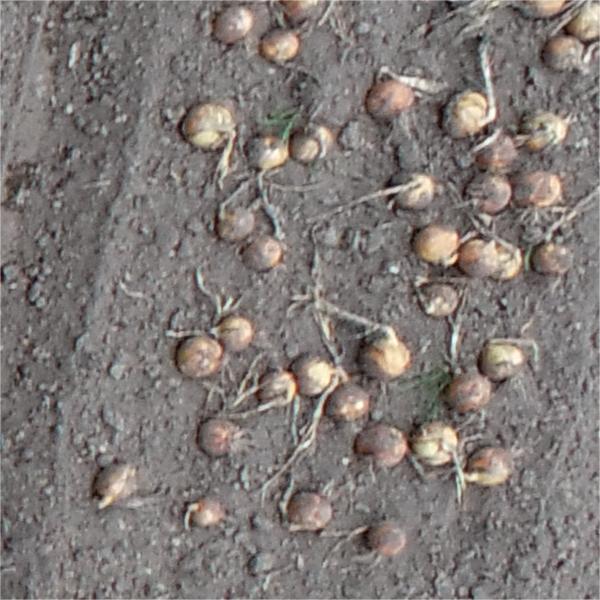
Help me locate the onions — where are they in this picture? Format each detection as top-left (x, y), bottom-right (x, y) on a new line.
top-left (329, 384), bottom-right (372, 422)
top-left (480, 339), bottom-right (522, 379)
top-left (258, 26), bottom-right (298, 63)
top-left (461, 239), bottom-right (496, 276)
top-left (216, 316), bottom-right (254, 349)
top-left (365, 80), bottom-right (414, 121)
top-left (396, 172), bottom-right (434, 212)
top-left (176, 333), bottom-right (222, 378)
top-left (544, 34), bottom-right (583, 70)
top-left (446, 90), bottom-right (489, 135)
top-left (472, 174), bottom-right (511, 213)
top-left (198, 418), bottom-right (240, 457)
top-left (247, 134), bottom-right (286, 168)
top-left (520, 110), bottom-right (564, 150)
top-left (445, 371), bottom-right (490, 412)
top-left (566, 7), bottom-right (599, 39)
top-left (416, 281), bottom-right (459, 316)
top-left (292, 127), bottom-right (332, 162)
top-left (215, 198), bottom-right (254, 241)
top-left (492, 245), bottom-right (522, 281)
top-left (181, 100), bottom-right (231, 146)
top-left (356, 423), bottom-right (406, 466)
top-left (241, 234), bottom-right (281, 270)
top-left (188, 494), bottom-right (225, 529)
top-left (360, 339), bottom-right (408, 379)
top-left (530, 238), bottom-right (569, 275)
top-left (478, 134), bottom-right (520, 172)
top-left (413, 222), bottom-right (458, 264)
top-left (292, 353), bottom-right (335, 395)
top-left (212, 4), bottom-right (254, 42)
top-left (257, 370), bottom-right (293, 404)
top-left (362, 520), bottom-right (408, 559)
top-left (94, 460), bottom-right (138, 507)
top-left (518, 0), bottom-right (565, 18)
top-left (466, 445), bottom-right (508, 486)
top-left (412, 420), bottom-right (456, 464)
top-left (278, 0), bottom-right (312, 30)
top-left (513, 174), bottom-right (562, 207)
top-left (285, 489), bottom-right (330, 530)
